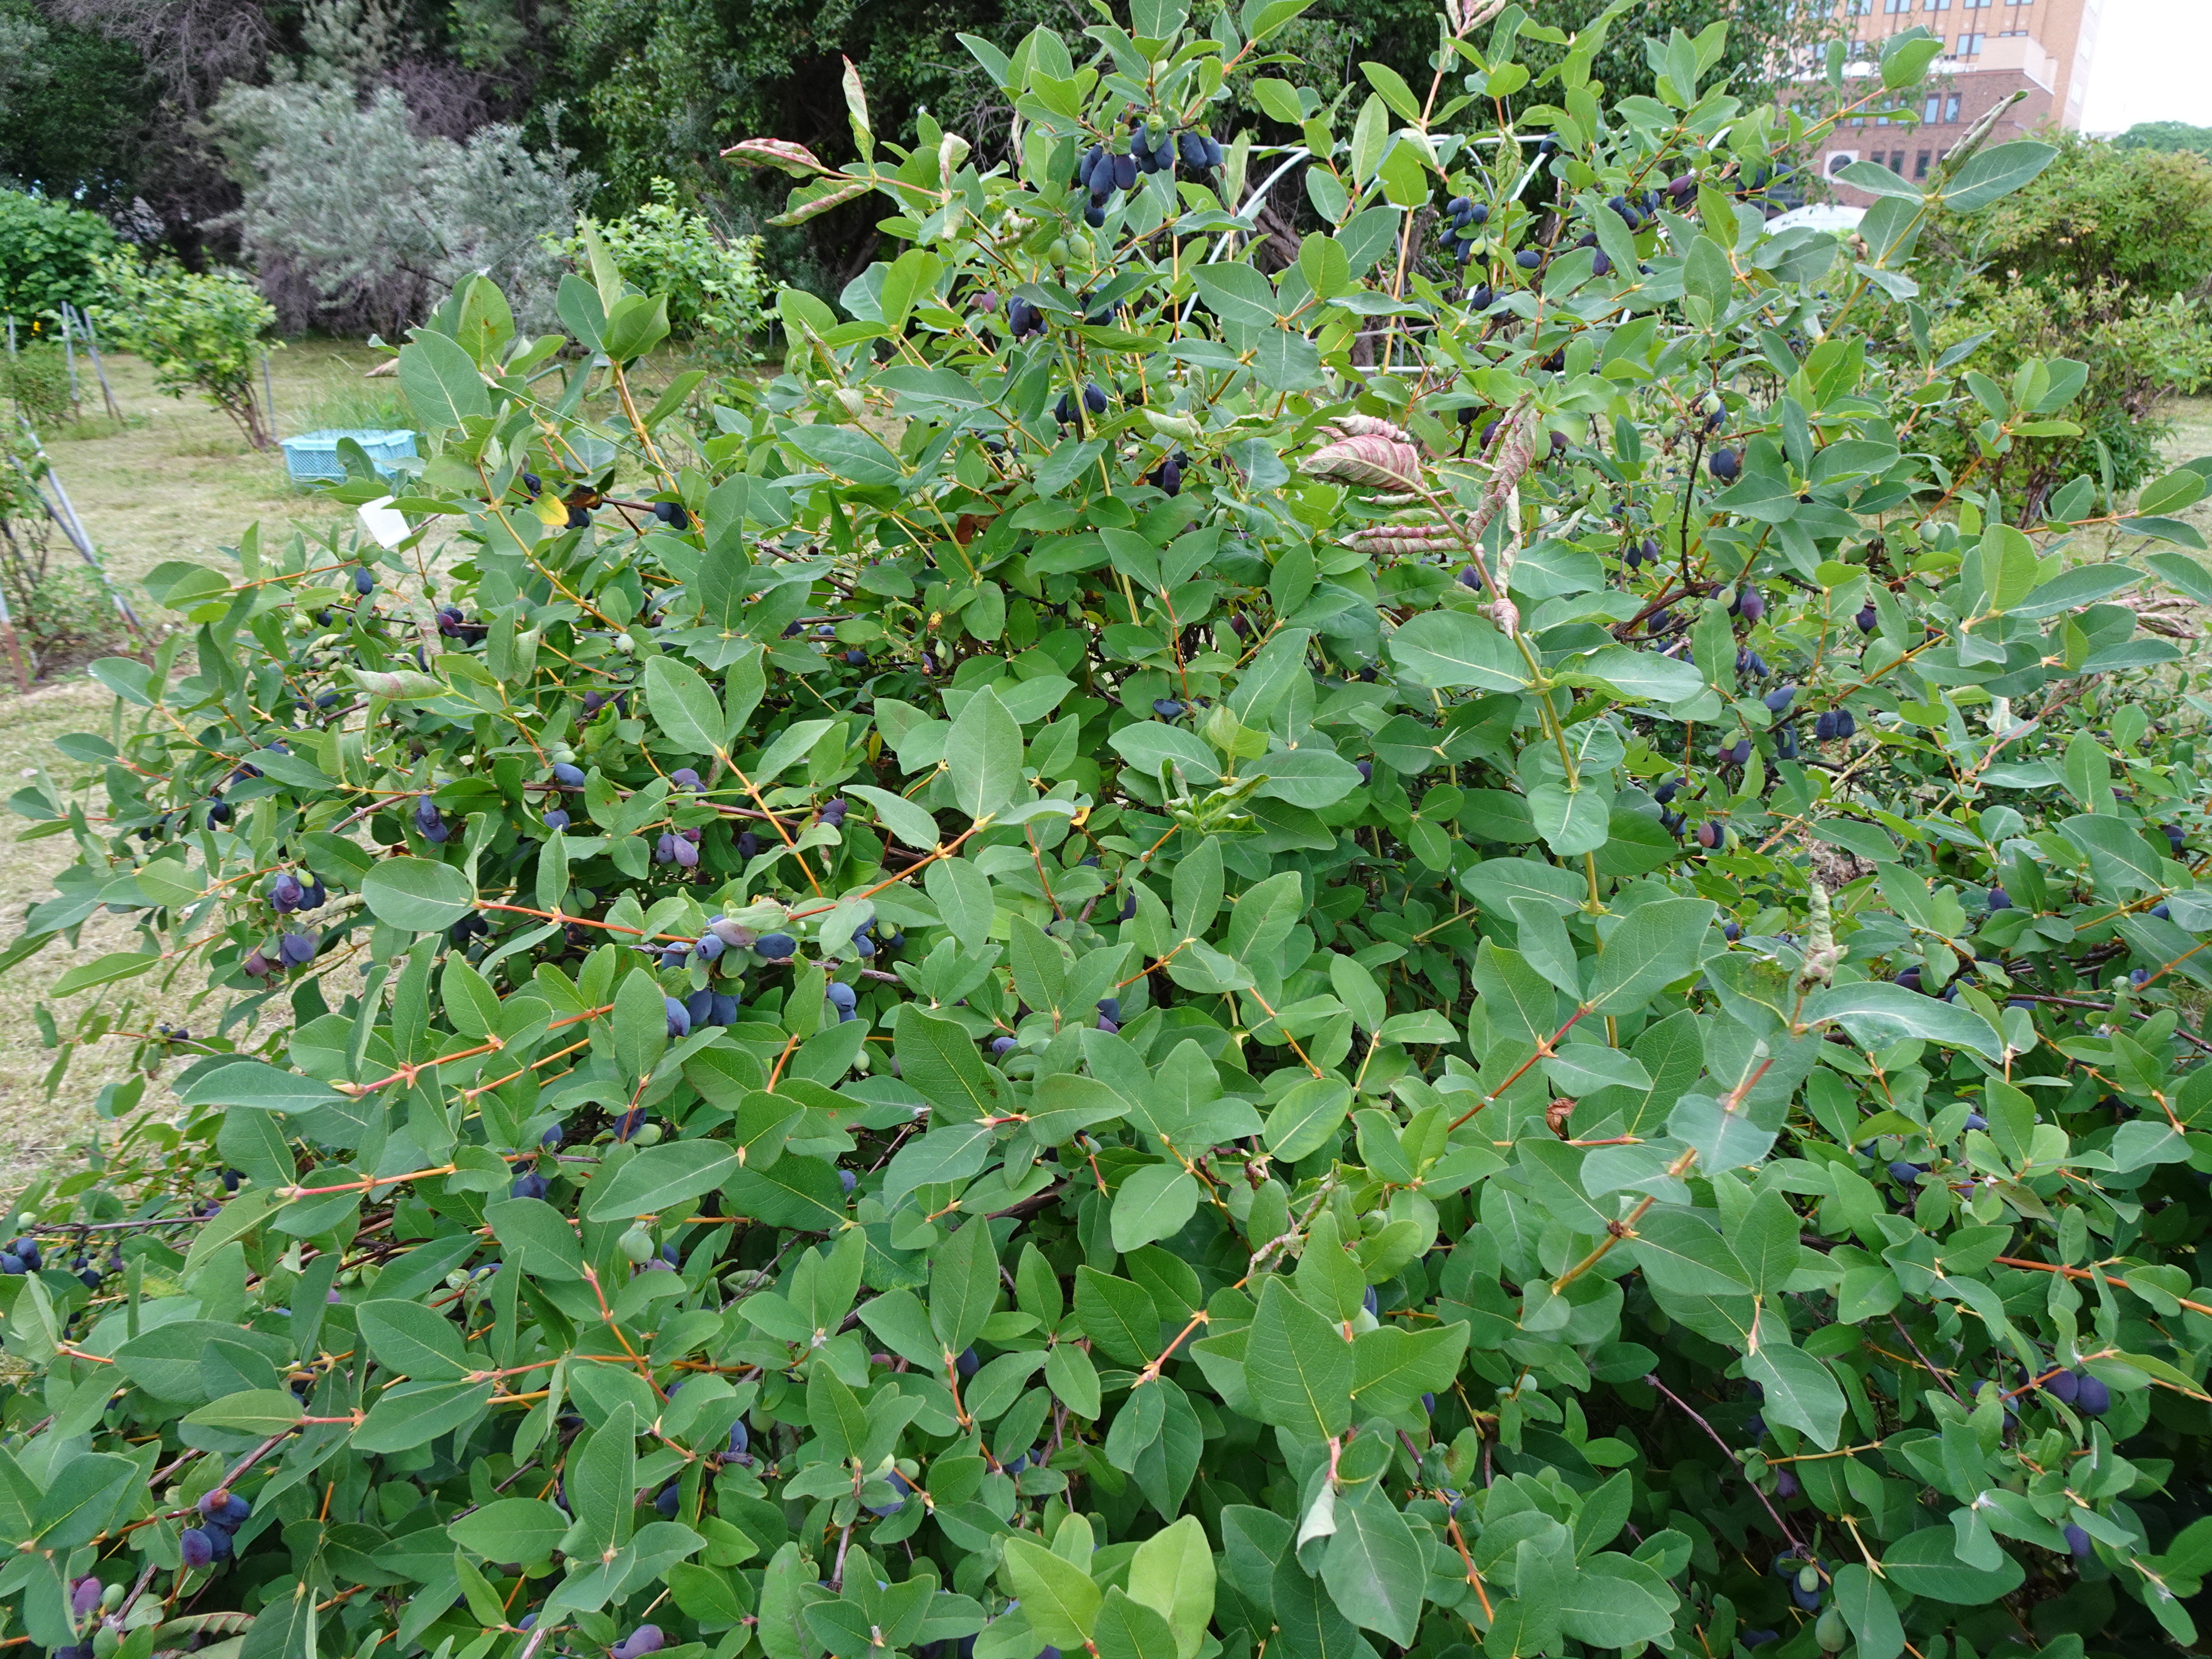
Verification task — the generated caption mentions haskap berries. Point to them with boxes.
[268,889,280,909]
[1783,723,1798,739]
[1085,383,1107,414]
[445,626,462,638]
[1961,1114,1987,1134]
[1931,1434,1942,1438]
[850,935,875,957]
[1639,192,1655,212]
[558,1482,571,1510]
[2009,1000,2036,1011]
[623,1230,657,1264]
[968,431,986,440]
[672,768,699,786]
[672,834,698,867]
[293,614,312,630]
[1458,405,1485,426]
[989,451,1004,471]
[70,1570,91,1591]
[1754,657,1769,677]
[1093,1544,1098,1553]
[1116,383,1144,405]
[1069,234,1090,259]
[1080,300,1096,326]
[1723,917,1733,928]
[821,799,848,817]
[1886,1162,1921,1186]
[1055,393,1069,423]
[1421,1392,1434,1414]
[1089,153,1116,207]
[1750,168,1766,195]
[575,885,597,908]
[1936,837,1944,848]
[1470,230,1486,256]
[1003,1600,1019,1617]
[304,658,321,673]
[1543,444,1554,462]
[1769,162,1794,183]
[1192,697,1202,707]
[1741,586,1764,622]
[707,916,755,947]
[326,1287,342,1304]
[665,1382,686,1399]
[655,502,671,521]
[1457,207,1472,225]
[1749,653,1758,669]
[16,1233,39,1257]
[1656,633,1671,643]
[1012,448,1019,457]
[1988,888,2010,910]
[1081,856,1099,869]
[318,1359,327,1370]
[180,1529,212,1567]
[1667,175,1691,196]
[931,1365,960,1391]
[1974,953,1991,963]
[875,1579,889,1594]
[315,611,331,628]
[1722,729,1739,751]
[1458,238,1477,265]
[197,1486,229,1514]
[1736,650,1750,674]
[424,780,454,789]
[1816,1560,1829,1591]
[1473,286,1490,310]
[1096,1015,1119,1035]
[1705,417,1723,434]
[231,765,256,788]
[667,503,687,529]
[461,630,477,648]
[1097,998,1118,1024]
[992,1037,1017,1056]
[311,877,326,908]
[233,1166,247,1179]
[631,1122,664,1150]
[1439,228,1461,247]
[1651,189,1660,204]
[1638,264,1653,275]
[1048,235,1070,270]
[261,933,280,960]
[158,1025,170,1034]
[542,1566,567,1592]
[1659,806,1671,825]
[465,914,489,937]
[1088,292,1115,326]
[516,1612,541,1635]
[2044,1367,2079,1406]
[784,620,804,636]
[1181,131,1206,171]
[1080,146,1103,186]
[1495,1386,1515,1405]
[67,1311,80,1324]
[1719,748,1734,761]
[281,940,299,969]
[1959,1200,1986,1226]
[586,588,594,600]
[659,630,682,653]
[1037,319,1048,335]
[653,616,665,627]
[1248,616,1260,634]
[1763,686,1795,713]
[1341,829,1355,843]
[0,1251,27,1275]
[1540,354,1554,374]
[629,1266,646,1286]
[514,1171,551,1200]
[826,982,856,1012]
[284,931,315,963]
[1187,523,1197,532]
[473,629,486,640]
[1447,197,1470,215]
[2096,730,2109,738]
[563,512,576,529]
[639,587,653,617]
[1480,421,1500,450]
[982,291,996,313]
[584,691,603,710]
[1028,328,1038,339]
[1723,924,1738,939]
[1845,545,1869,563]
[1453,215,1465,229]
[1992,957,2006,975]
[275,1307,292,1316]
[1675,185,1696,209]
[1709,453,1720,475]
[681,826,701,842]
[289,1389,311,1434]
[1710,820,1724,849]
[295,921,318,950]
[1698,821,1714,847]
[754,934,797,960]
[1439,1489,1462,1518]
[298,885,316,912]
[1084,200,1105,227]
[560,1404,584,1431]
[794,1362,811,1378]
[1654,777,1687,805]
[2111,787,2121,797]
[1757,835,1764,843]
[1717,579,1738,609]
[1359,663,1379,682]
[1748,1415,1765,1434]
[552,759,588,788]
[614,668,636,678]
[1619,500,1626,509]
[1572,490,1578,496]
[922,653,933,671]
[223,1172,239,1191]
[889,1054,899,1076]
[1715,568,1730,583]
[203,1206,223,1218]
[1608,195,1625,212]
[358,664,366,672]
[1231,613,1246,640]
[1164,460,1180,498]
[788,1368,798,1383]
[1147,352,1155,359]
[566,922,586,945]
[2004,1412,2017,1430]
[295,696,313,711]
[1491,291,1509,321]
[1239,533,1250,540]
[354,657,361,664]
[315,871,341,888]
[2168,836,2190,853]
[291,797,301,809]
[314,688,339,708]
[1897,966,1921,976]
[1775,1550,1799,1578]
[290,1360,314,1394]
[737,831,757,861]
[1693,393,1709,417]
[1010,299,1030,337]
[1472,204,1488,225]
[1684,652,1696,665]
[1172,449,1188,469]
[679,780,706,795]
[1514,251,1540,269]
[562,885,581,918]
[1149,462,1166,488]
[1626,546,1641,567]
[1054,601,1067,617]
[1774,1470,1799,1498]
[853,916,876,938]
[1454,240,1463,253]
[1397,704,1410,716]
[1637,204,1648,219]
[355,568,373,596]
[1051,915,1071,923]
[808,545,819,556]
[1131,126,1154,166]
[1333,1307,1379,1339]
[274,892,298,913]
[1620,207,1639,231]
[105,1398,118,1411]
[613,1623,666,1657]
[1577,232,1597,248]
[695,935,724,960]
[1550,430,1568,449]
[1651,610,1671,630]
[1096,285,1125,309]
[2162,824,2186,838]
[1135,104,1146,128]
[656,833,674,863]
[201,1520,233,1562]
[455,1592,466,1608]
[204,815,216,831]
[111,1257,122,1273]
[2046,792,2064,808]
[1066,391,1088,424]
[1758,1429,1770,1444]
[839,1169,857,1193]
[51,1246,82,1258]
[1734,178,1750,201]
[1794,1571,1818,1611]
[686,986,716,1029]
[97,1583,125,1612]
[862,1471,910,1518]
[1539,132,1560,153]
[2149,903,2170,922]
[298,867,314,887]
[206,797,231,822]
[728,1419,747,1454]
[1951,994,1970,1012]
[1477,579,1482,590]
[906,414,938,430]
[839,1008,857,1023]
[420,795,439,828]
[2116,796,2134,804]
[1212,459,1228,486]
[1909,1161,1931,1173]
[169,1029,189,1043]
[139,828,152,841]
[1672,614,1687,634]
[2018,1361,2052,1397]
[1083,1135,1101,1156]
[1376,554,1393,565]
[1463,563,1477,591]
[615,1105,644,1143]
[960,1630,981,1658]
[561,483,582,499]
[1355,761,1372,783]
[189,1200,218,1216]
[1731,738,1750,765]
[926,553,937,568]
[1067,597,1082,621]
[278,844,289,860]
[894,1458,921,1481]
[870,1354,895,1372]
[417,646,430,673]
[346,615,354,628]
[1856,1140,1881,1159]
[1656,639,1678,660]
[1486,244,1497,257]
[1033,1645,1060,1659]
[2141,742,2154,748]
[1153,698,1185,717]
[1612,505,1623,519]
[1969,1380,1987,1393]
[1724,824,1739,850]
[1777,934,1798,950]
[1139,152,1159,174]
[1710,584,1726,600]
[205,1491,253,1523]
[1777,731,1796,758]
[414,800,447,843]
[918,1590,949,1658]
[444,607,463,623]
[1029,1448,1041,1463]
[1363,1285,1378,1316]
[1747,1629,1763,1648]
[2130,968,2150,985]
[544,806,571,832]
[711,990,740,1029]
[1125,405,1135,431]
[661,942,692,969]
[1856,1136,1880,1149]
[647,1260,673,1275]
[583,484,603,509]
[497,1562,522,1577]
[87,1252,98,1259]
[847,650,867,667]
[263,742,289,758]
[1475,251,1489,265]
[1856,605,1877,634]
[71,1257,89,1269]
[453,919,470,943]
[817,625,835,636]
[1008,295,1022,313]
[1815,711,1837,741]
[1553,348,1566,372]
[1122,110,1137,131]
[957,1345,981,1379]
[158,809,174,830]
[878,920,896,939]
[2020,712,2033,721]
[1954,1180,1977,1197]
[2076,1373,2110,1415]
[256,768,264,778]
[437,613,454,629]
[663,993,691,1039]
[63,1327,71,1341]
[69,1583,76,1606]
[1023,1451,1030,1472]
[1666,467,1677,473]
[654,1482,683,1516]
[1514,1374,1538,1390]
[608,694,625,720]
[862,1453,896,1484]
[21,1252,43,1272]
[705,914,726,935]
[819,812,843,828]
[242,947,270,978]
[853,1049,870,1070]
[469,1264,504,1311]
[1985,914,1991,919]
[1421,558,1427,565]
[653,1416,663,1435]
[817,1580,828,1587]
[1726,591,1741,617]
[1002,1453,1025,1477]
[2,1243,13,1253]
[1661,416,1676,437]
[1945,978,1976,1000]
[1565,199,1583,225]
[1921,523,1939,544]
[987,434,1003,452]
[1713,400,1725,422]
[541,1122,563,1152]
[616,633,635,654]
[1906,641,1924,654]
[523,491,540,505]
[186,1633,202,1653]
[549,1494,571,1529]
[1921,621,1942,646]
[1718,449,1740,478]
[1029,302,1046,330]
[522,473,542,491]
[1762,1630,1780,1641]
[277,874,304,904]
[661,1242,678,1265]
[1885,1185,1906,1210]
[1593,249,1608,276]
[1668,813,1686,835]
[340,1271,360,1286]
[1131,432,1148,442]
[54,1638,95,1659]
[571,506,590,527]
[73,1578,103,1621]
[1835,709,1855,738]
[619,1223,646,1247]
[517,833,537,849]
[78,1269,100,1288]
[883,930,903,948]
[1155,133,1175,170]
[2064,1523,2092,1559]
[17,1212,35,1230]
[1201,135,1223,167]
[1695,181,1707,195]
[1121,896,1138,922]
[1892,975,1931,998]
[1800,1566,1818,1591]
[935,639,946,658]
[744,946,769,967]
[505,1147,532,1172]
[1698,384,1720,416]
[112,1242,122,1258]
[1642,539,1657,561]
[1114,154,1136,191]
